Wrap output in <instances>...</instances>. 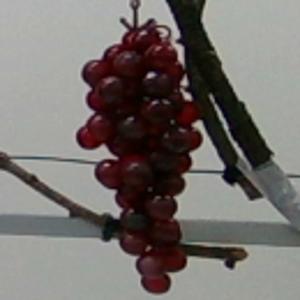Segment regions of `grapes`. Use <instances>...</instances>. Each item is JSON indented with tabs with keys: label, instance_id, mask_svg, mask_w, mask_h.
<instances>
[{
	"label": "grapes",
	"instance_id": "grapes-1",
	"mask_svg": "<svg viewBox=\"0 0 300 300\" xmlns=\"http://www.w3.org/2000/svg\"><path fill=\"white\" fill-rule=\"evenodd\" d=\"M177 58L175 45L157 30L134 27L101 60H88L81 69L92 88L85 104L95 114L79 127L76 140L86 150L105 145L118 158L98 161L94 175L105 189H117L125 229L120 247L138 257L142 287L155 296L168 293L169 273H181L188 264L179 242L182 225L172 217L178 210L175 198L187 188L189 153L203 143L193 127L201 110L180 91L185 68Z\"/></svg>",
	"mask_w": 300,
	"mask_h": 300
}]
</instances>
